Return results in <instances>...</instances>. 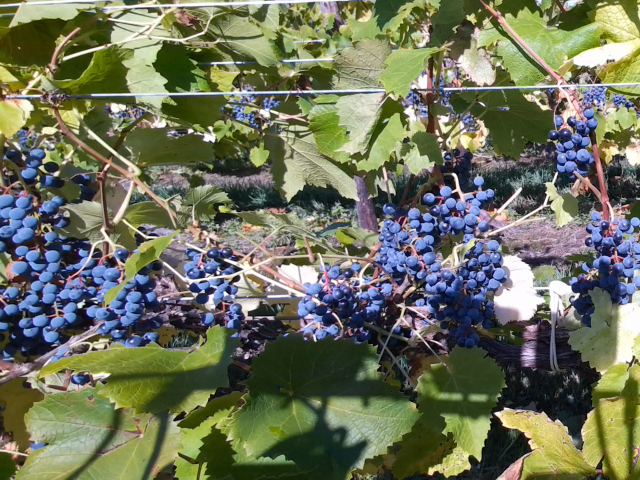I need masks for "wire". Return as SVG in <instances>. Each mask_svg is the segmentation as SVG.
Masks as SVG:
<instances>
[{"label":"wire","mask_w":640,"mask_h":480,"mask_svg":"<svg viewBox=\"0 0 640 480\" xmlns=\"http://www.w3.org/2000/svg\"><path fill=\"white\" fill-rule=\"evenodd\" d=\"M384 85H361L360 87L346 88H288V89H262L255 91H229V90H206L198 92H176V91H108L97 92L94 90H82L74 92H51L49 94H7L4 93L2 98L5 101H51L54 99H76L84 97H92L95 99L110 98H174V99H200L208 97H227V98H257L264 96H290V95H348L362 94L369 92L376 94L384 92Z\"/></svg>","instance_id":"1"},{"label":"wire","mask_w":640,"mask_h":480,"mask_svg":"<svg viewBox=\"0 0 640 480\" xmlns=\"http://www.w3.org/2000/svg\"><path fill=\"white\" fill-rule=\"evenodd\" d=\"M556 84H547V85H525V86H473V85H453V86H414L410 88L411 92L416 91H455V90H470V91H487V92H497V91H505V92H514V91H527V90H537V91H545L549 89H556Z\"/></svg>","instance_id":"2"},{"label":"wire","mask_w":640,"mask_h":480,"mask_svg":"<svg viewBox=\"0 0 640 480\" xmlns=\"http://www.w3.org/2000/svg\"><path fill=\"white\" fill-rule=\"evenodd\" d=\"M639 85L638 81L634 82H605V83H575L568 84L563 83L562 87L566 89H577V88H607V87H637Z\"/></svg>","instance_id":"3"},{"label":"wire","mask_w":640,"mask_h":480,"mask_svg":"<svg viewBox=\"0 0 640 480\" xmlns=\"http://www.w3.org/2000/svg\"><path fill=\"white\" fill-rule=\"evenodd\" d=\"M296 294L294 292H288L278 295H237V300H248V301H256V300H280V299H294Z\"/></svg>","instance_id":"4"}]
</instances>
